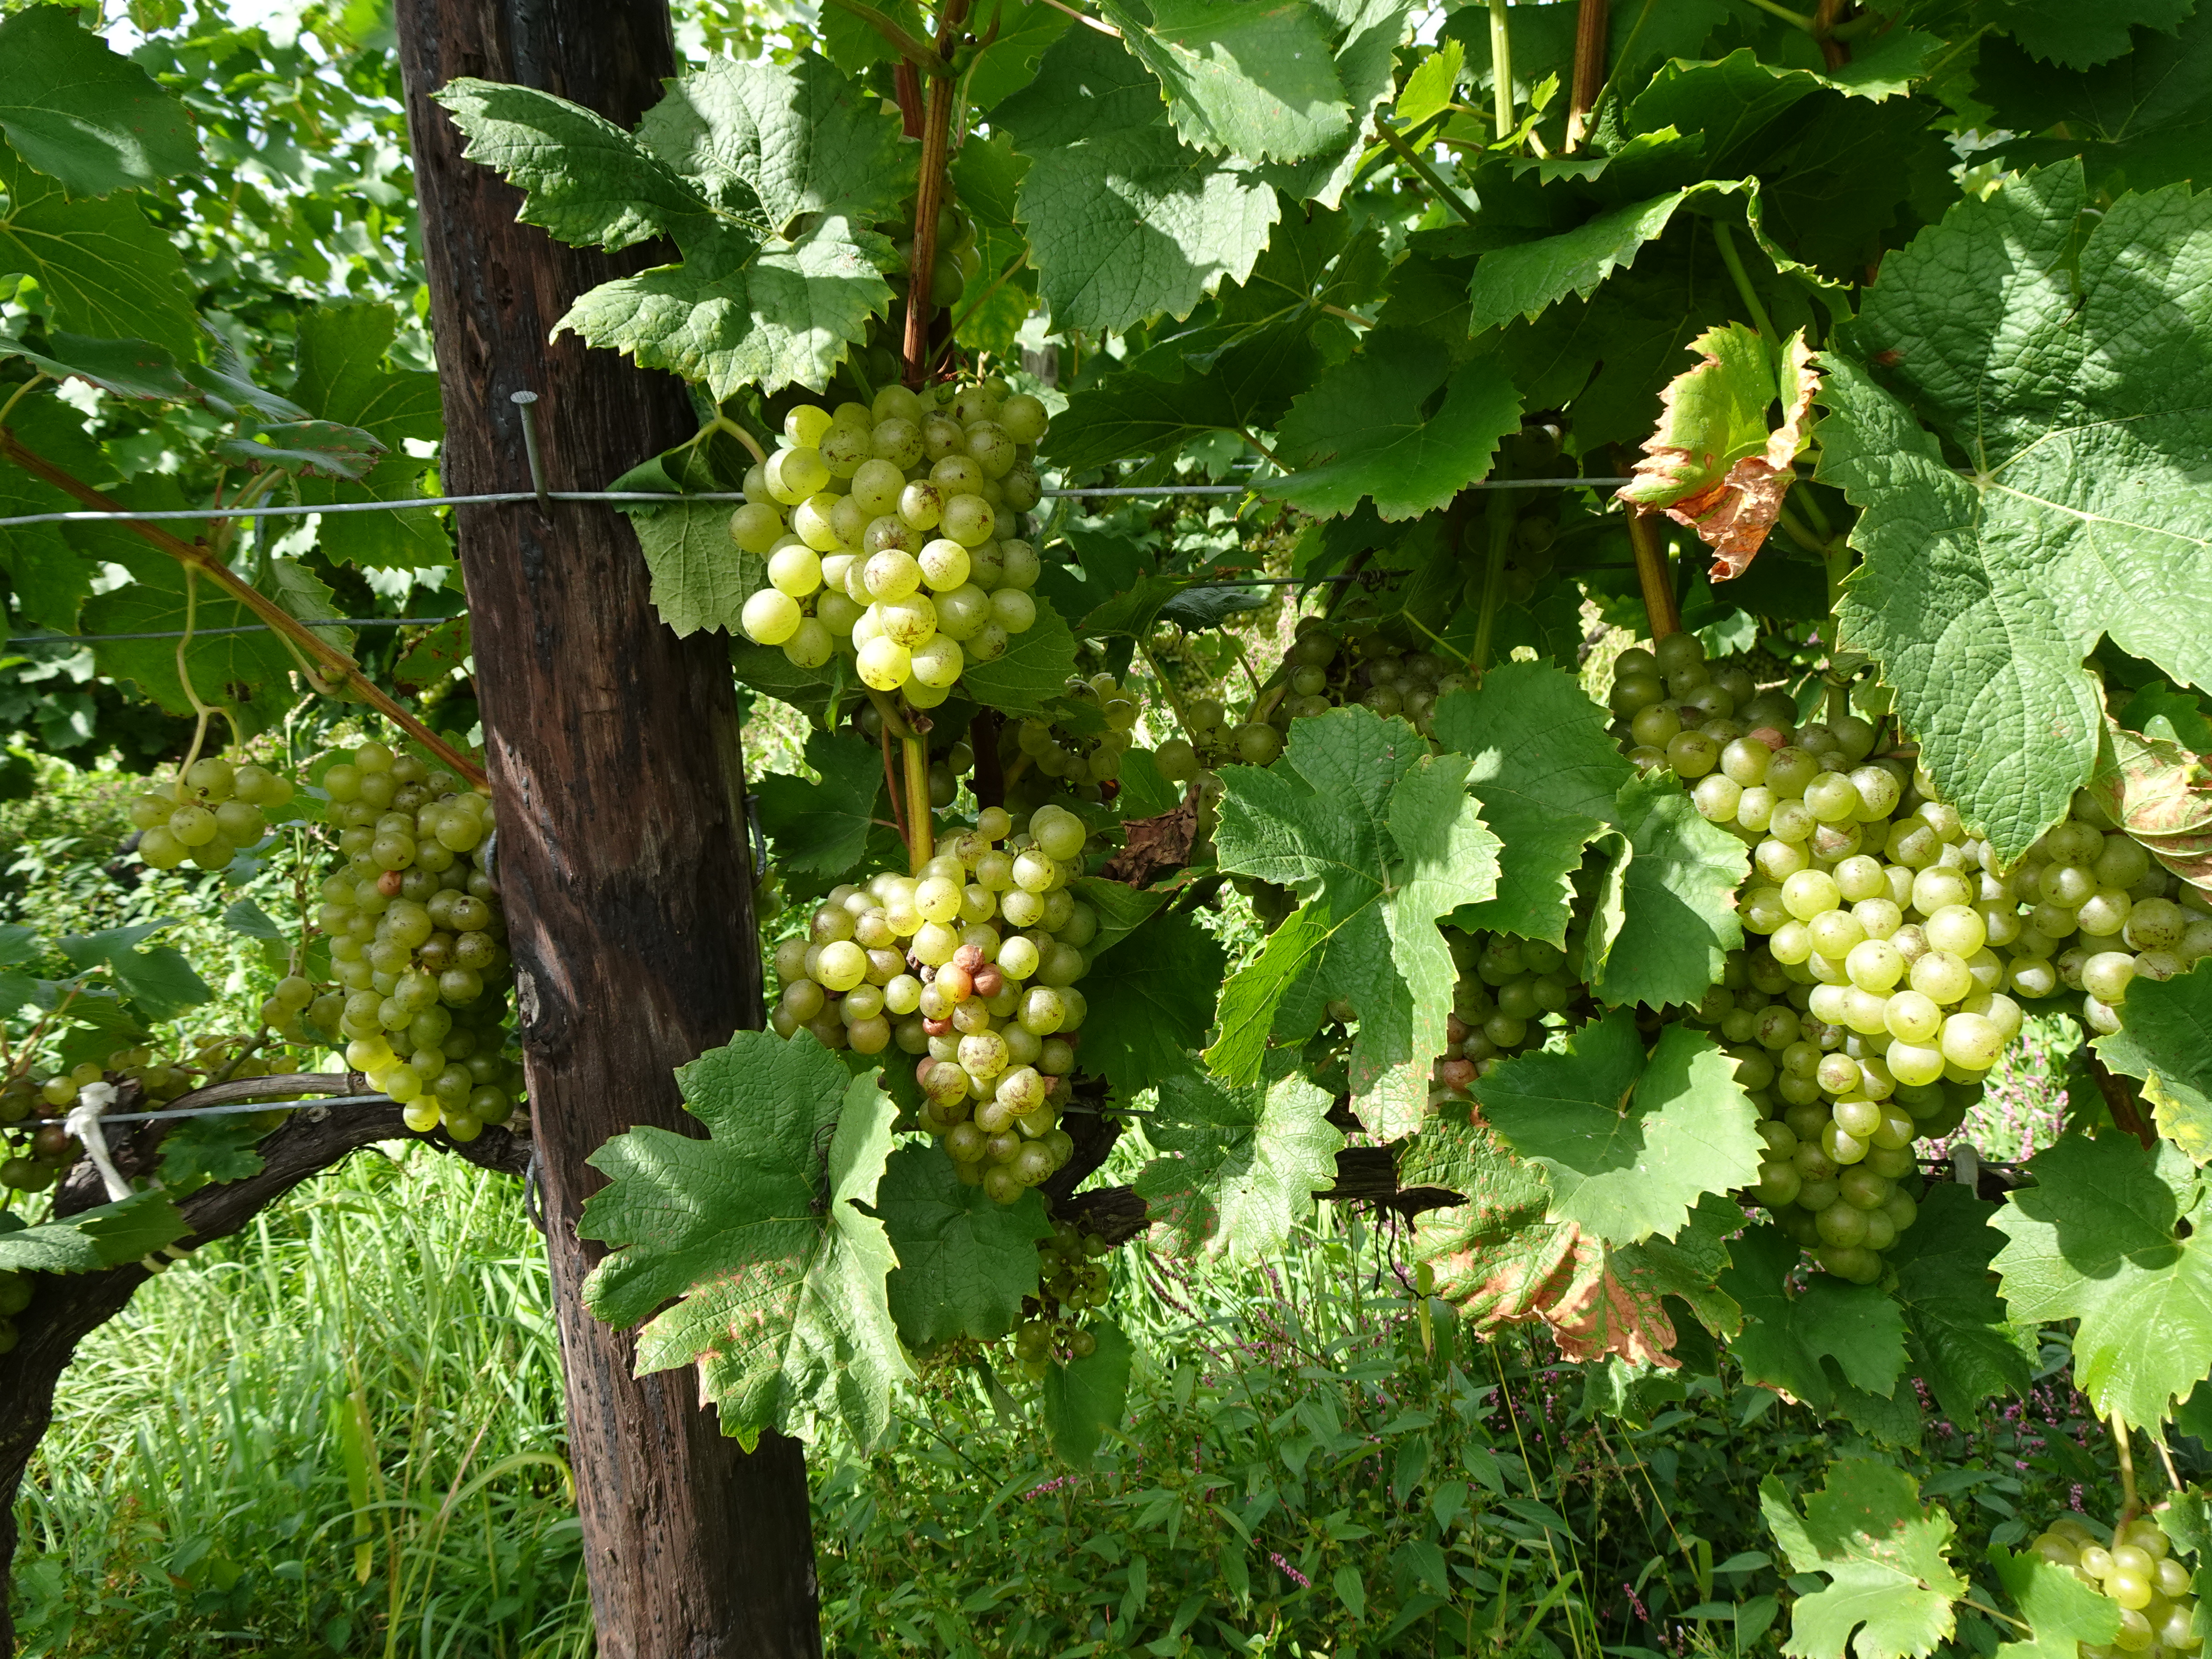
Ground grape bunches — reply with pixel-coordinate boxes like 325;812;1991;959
1229;873;1300;934
261;976;344;1041
130;758;291;870
195;1033;300;1134
860;696;973;807
1287;597;1478;760
1317;1002;1360;1029
1021;672;1141;800
822;387;1050;708
1971;789;2212;1034
1154;698;1287;858
2023;1518;2212;1659
1611;630;1800;780
771;803;1100;1204
1693;718;2022;1085
318;743;529;1141
1429;847;1611;1103
1015;1220;1111;1363
734;405;864;669
1687;946;1984;1285
0;1047;191;1192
